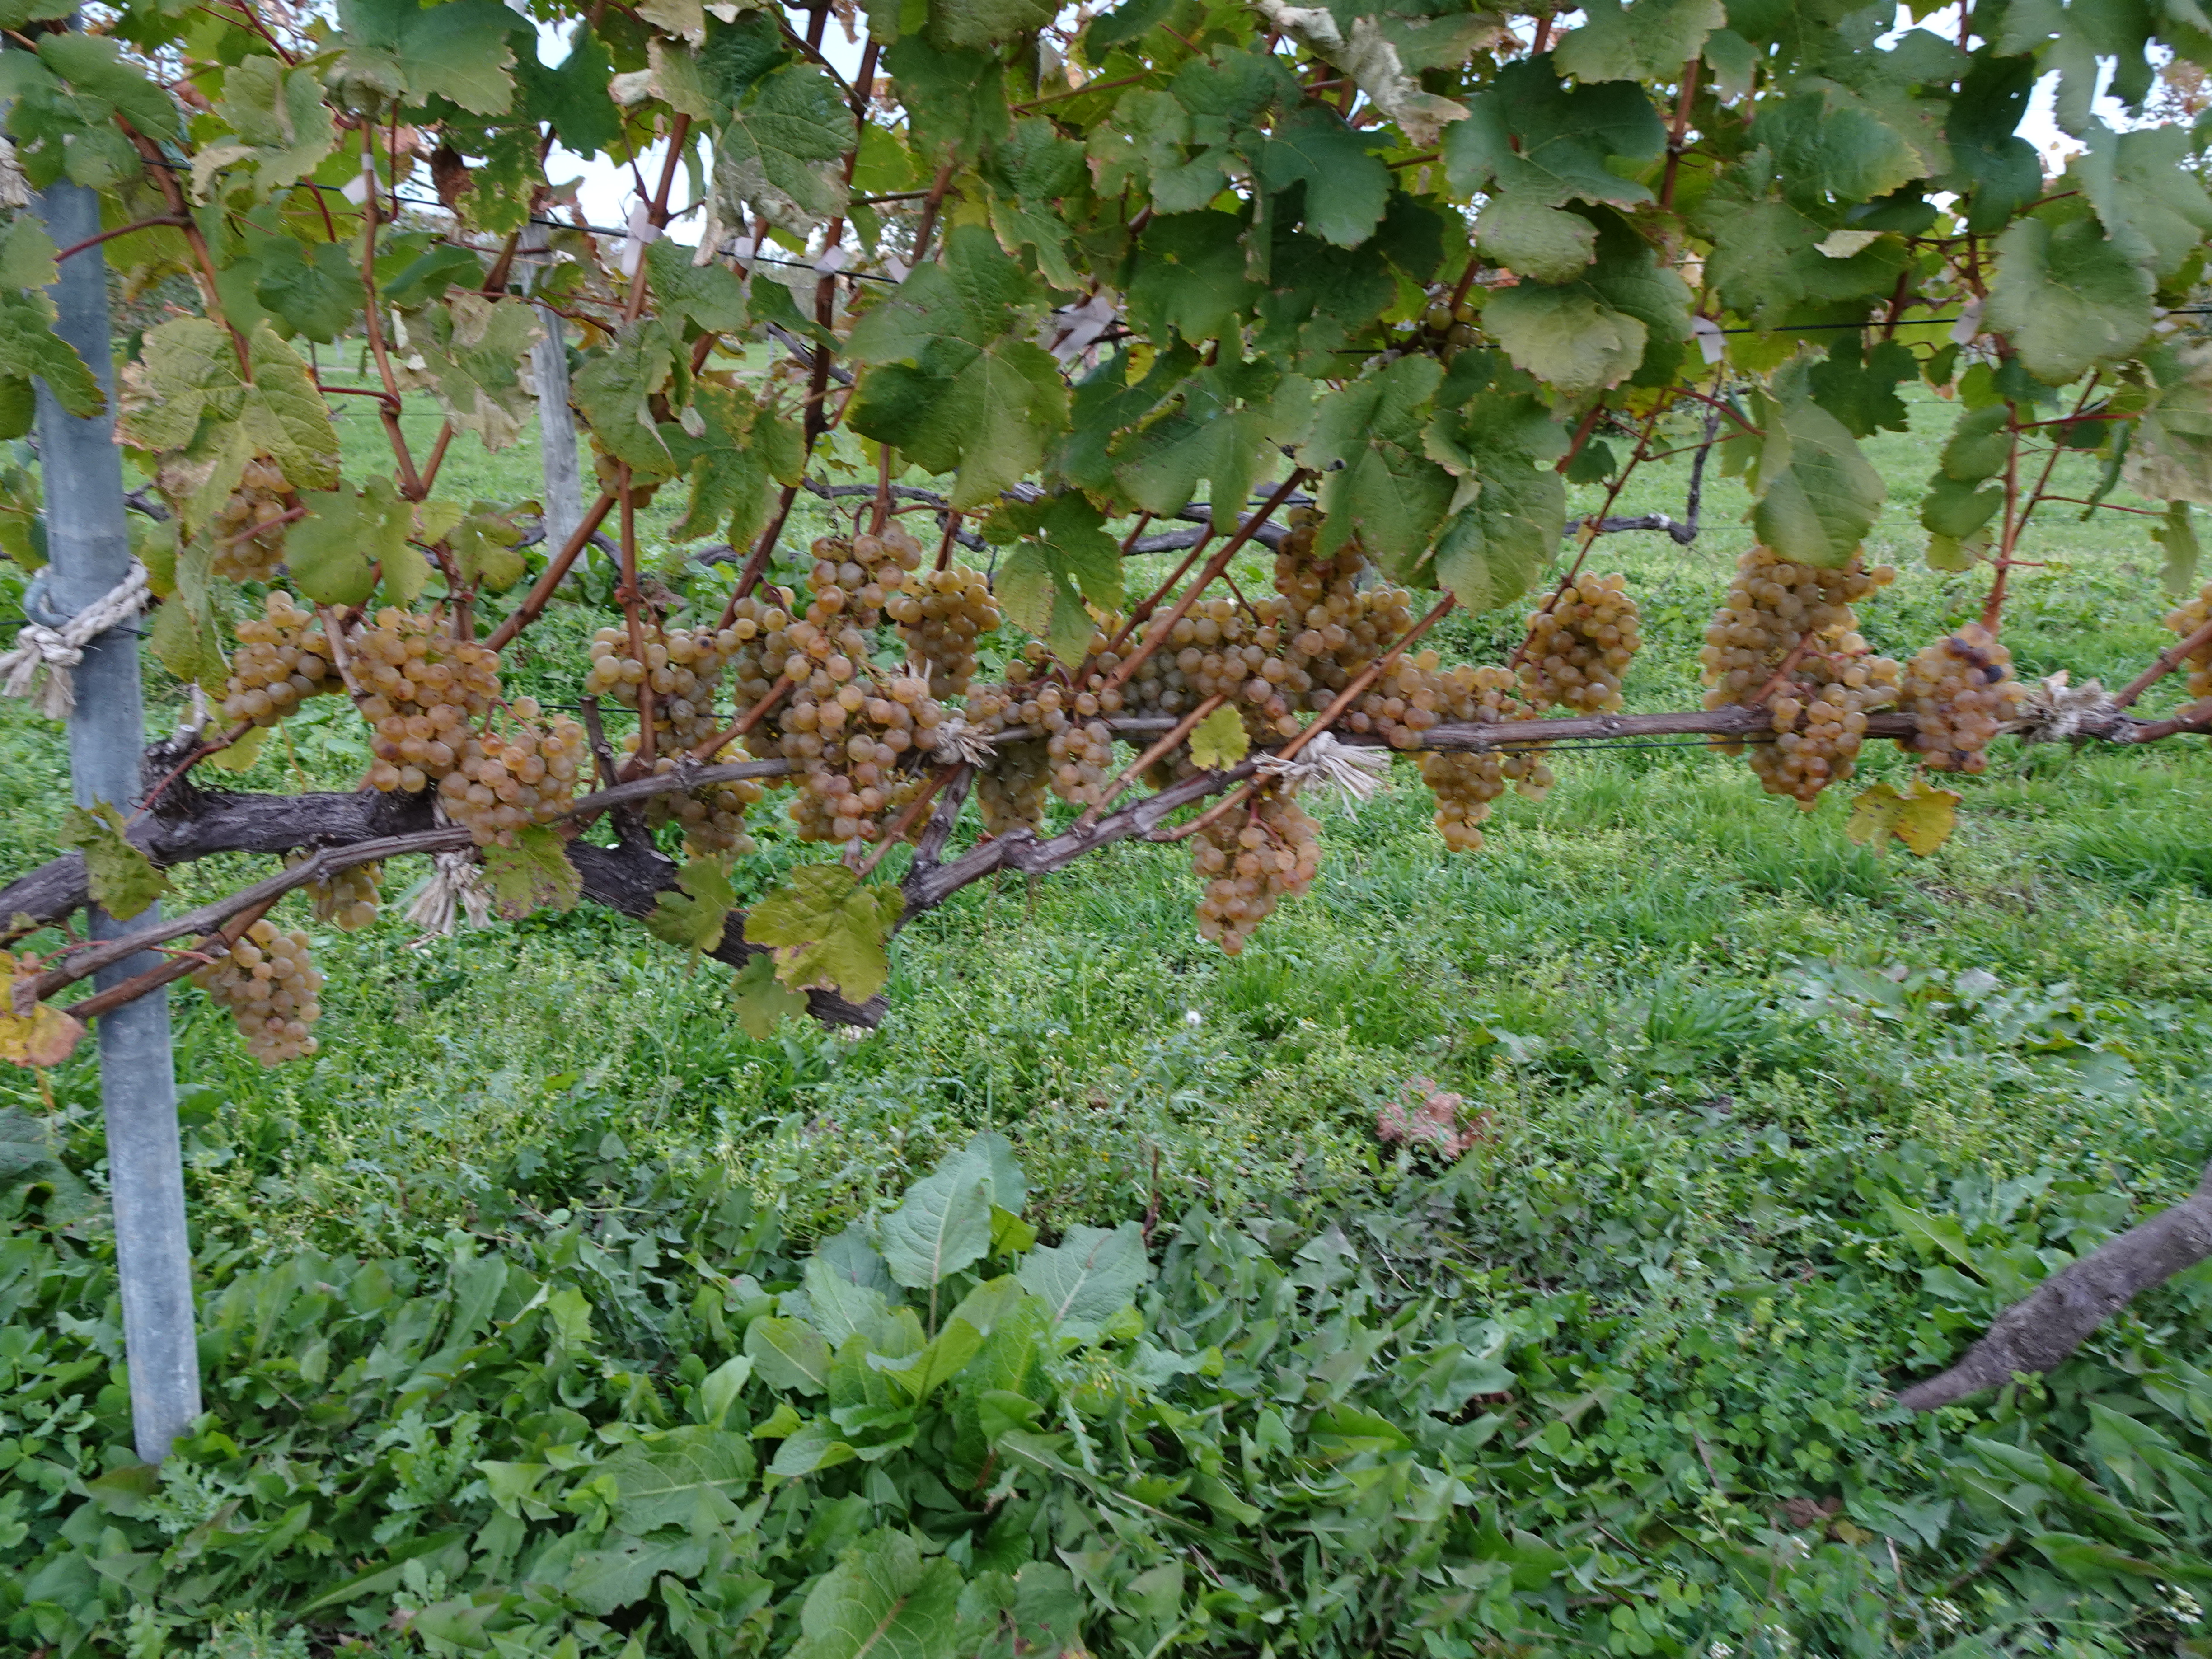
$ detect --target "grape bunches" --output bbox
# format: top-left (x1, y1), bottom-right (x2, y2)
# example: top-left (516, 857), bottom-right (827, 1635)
top-left (2161, 575), bottom-right (2212, 722)
top-left (222, 584), bottom-right (346, 730)
top-left (652, 742), bottom-right (772, 859)
top-left (798, 301), bottom-right (869, 364)
top-left (803, 518), bottom-right (925, 633)
top-left (973, 727), bottom-right (1052, 859)
top-left (886, 563), bottom-right (1002, 700)
top-left (1418, 728), bottom-right (1506, 859)
top-left (1278, 571), bottom-right (1415, 663)
top-left (1132, 593), bottom-right (1315, 744)
top-left (957, 607), bottom-right (1140, 725)
top-left (1747, 731), bottom-right (1858, 817)
top-left (433, 694), bottom-right (591, 852)
top-left (1190, 795), bottom-right (1328, 960)
top-left (1697, 522), bottom-right (1894, 756)
top-left (1158, 742), bottom-right (1222, 810)
top-left (587, 619), bottom-right (741, 749)
top-left (1311, 641), bottom-right (1570, 799)
top-left (1272, 501), bottom-right (1368, 615)
top-left (341, 601), bottom-right (505, 792)
top-left (1777, 630), bottom-right (1907, 794)
top-left (184, 915), bottom-right (327, 1074)
top-left (1900, 616), bottom-right (2028, 776)
top-left (710, 584), bottom-right (865, 710)
top-left (280, 847), bottom-right (392, 935)
top-left (1517, 568), bottom-right (1646, 721)
top-left (1039, 721), bottom-right (1125, 810)
top-left (202, 459), bottom-right (304, 587)
top-left (783, 675), bottom-right (957, 855)
top-left (1424, 296), bottom-right (1497, 367)
top-left (382, 1597), bottom-right (432, 1635)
